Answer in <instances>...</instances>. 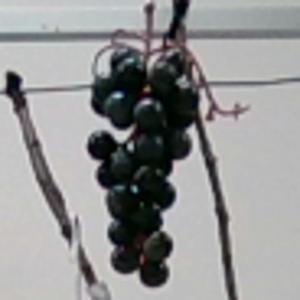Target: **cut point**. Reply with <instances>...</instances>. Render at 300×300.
<instances>
[{"label":"cut point","instance_id":"obj_1","mask_svg":"<svg viewBox=\"0 0 300 300\" xmlns=\"http://www.w3.org/2000/svg\"><path fill=\"white\" fill-rule=\"evenodd\" d=\"M155 8V0H146L141 7V11L143 12L144 31L146 35V48L144 51V58L147 62V68L152 57V25Z\"/></svg>","mask_w":300,"mask_h":300}]
</instances>
